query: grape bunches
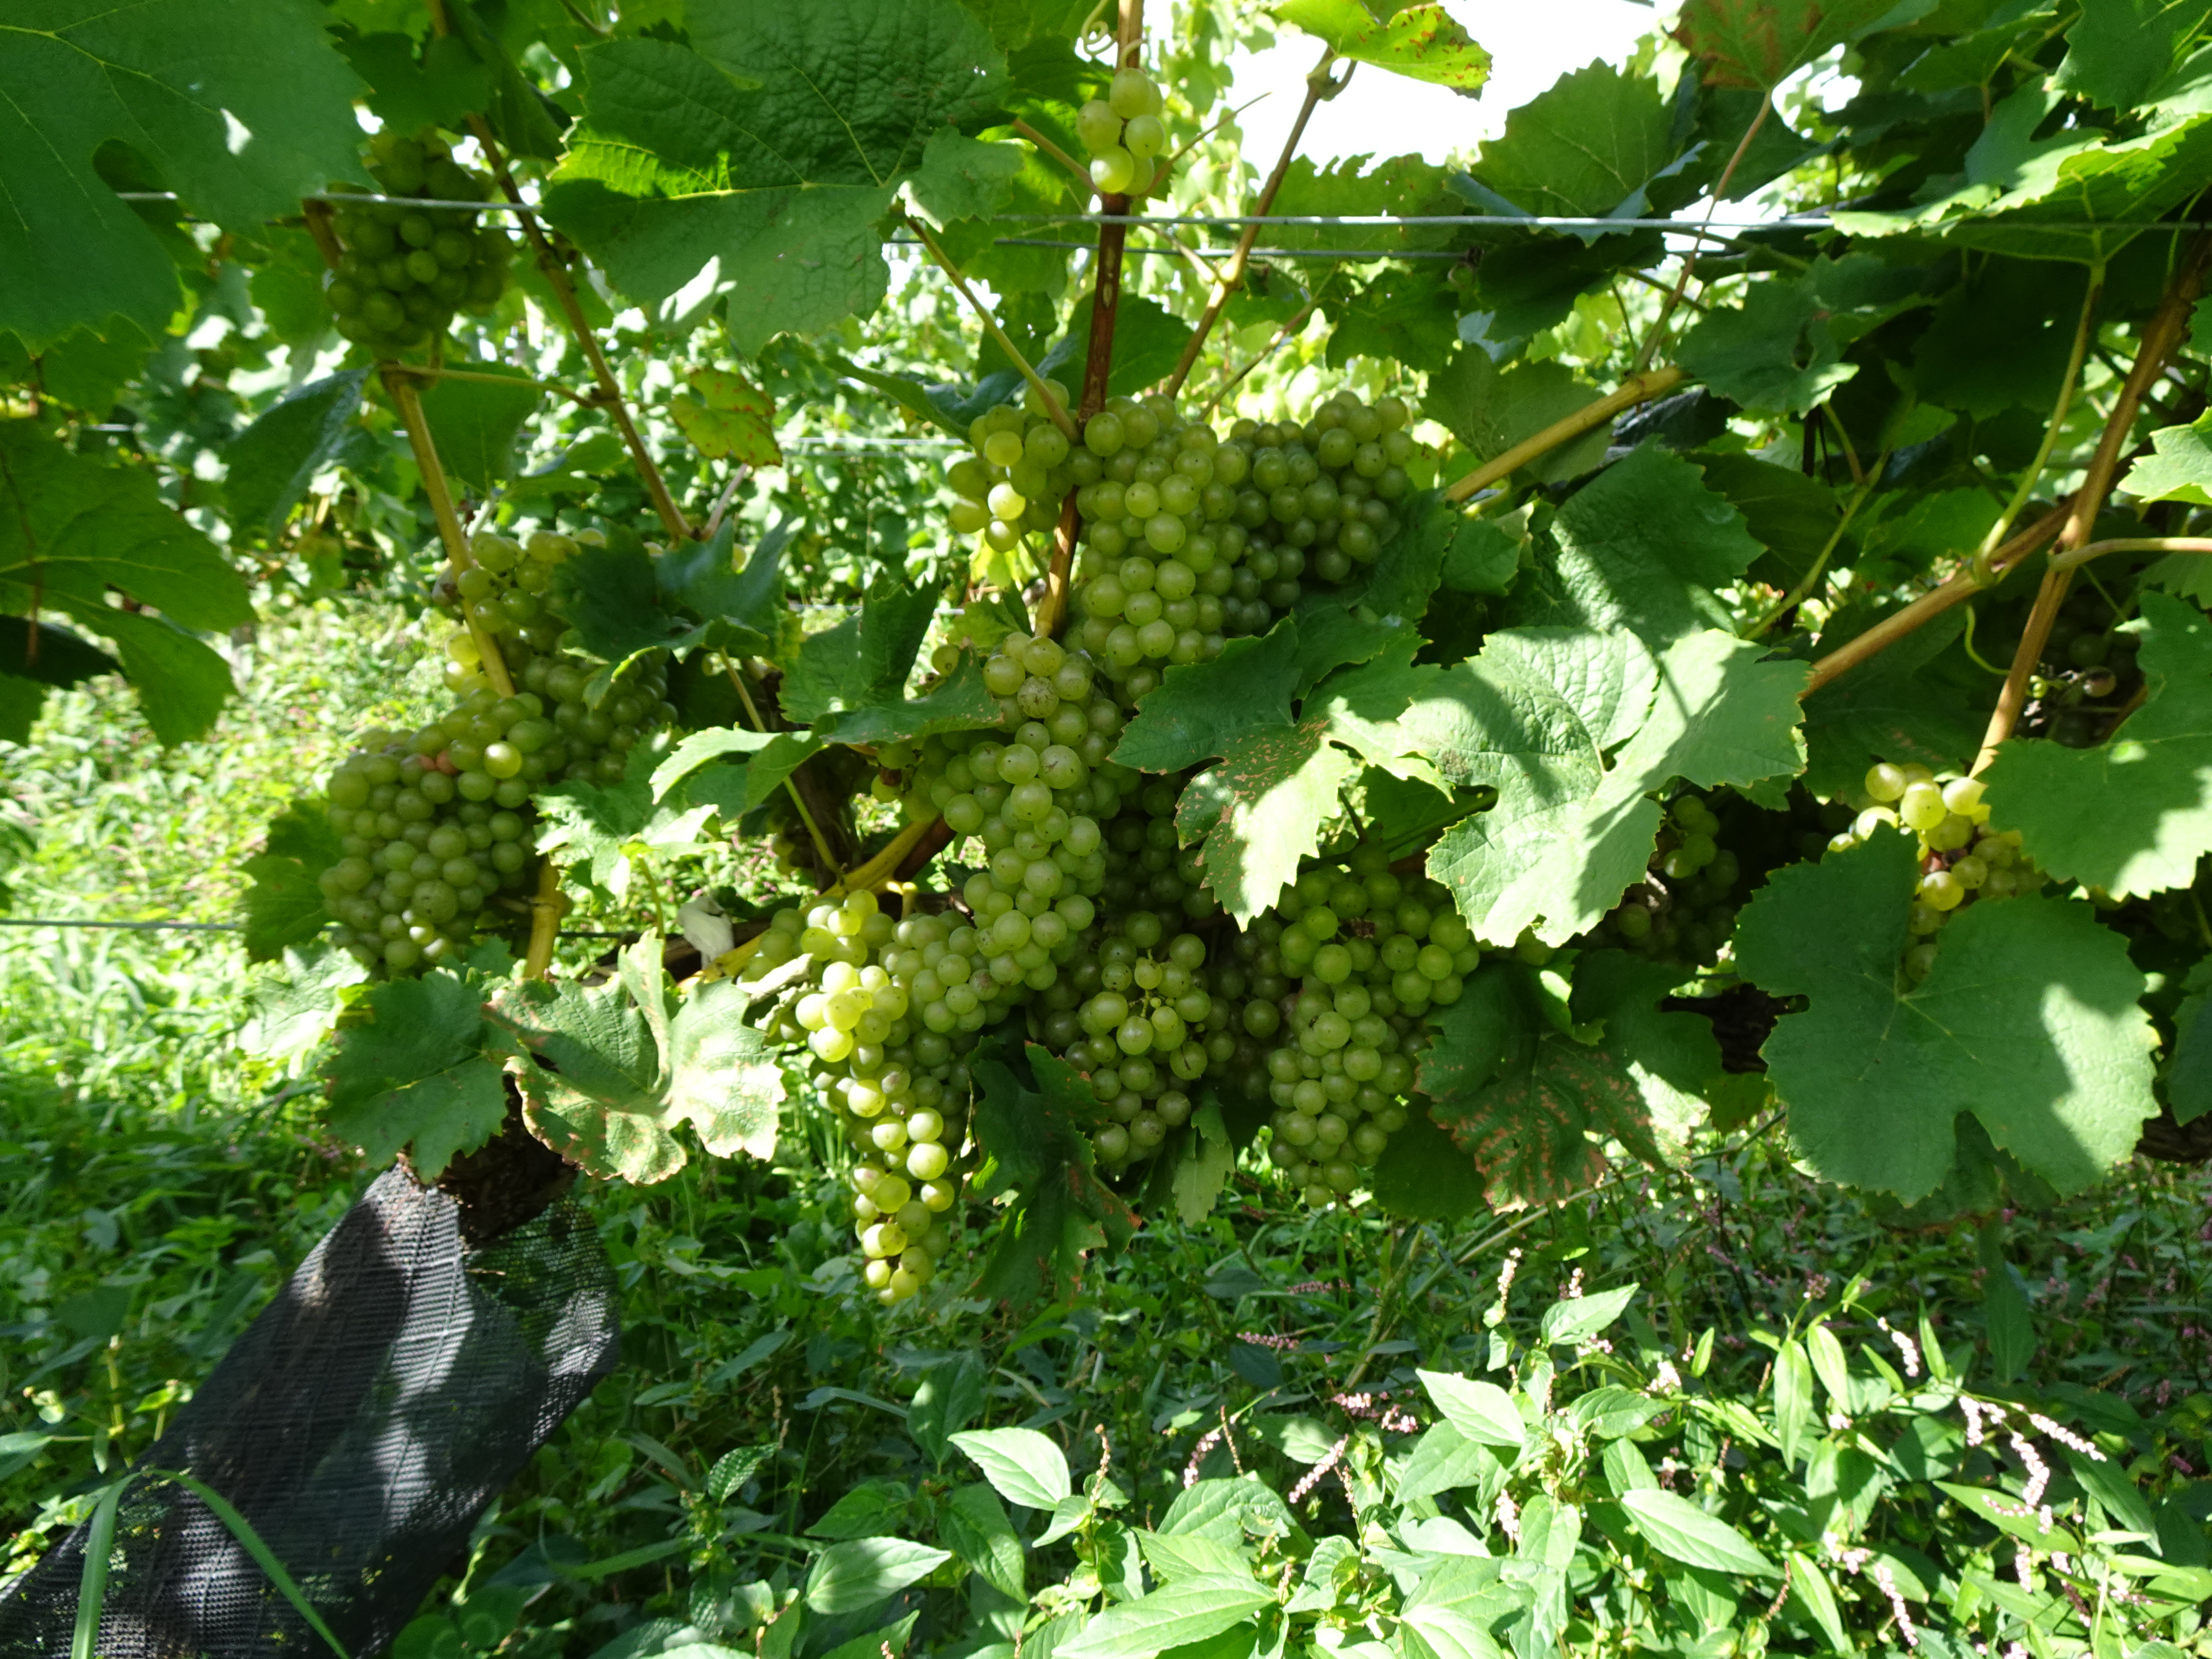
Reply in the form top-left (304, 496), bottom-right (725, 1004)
top-left (328, 127), bottom-right (512, 359)
top-left (1267, 865), bottom-right (1494, 1207)
top-left (458, 530), bottom-right (609, 653)
top-left (1209, 908), bottom-right (1294, 1101)
top-left (1077, 68), bottom-right (1164, 196)
top-left (1046, 917), bottom-right (1234, 1182)
top-left (1802, 760), bottom-right (2052, 993)
top-left (1232, 391), bottom-right (1416, 637)
top-left (319, 690), bottom-right (566, 971)
top-left (945, 379), bottom-right (1249, 708)
top-left (1099, 758), bottom-right (1220, 935)
top-left (871, 628), bottom-right (1146, 968)
top-left (641, 535), bottom-right (746, 570)
top-left (745, 892), bottom-right (1034, 1308)
top-left (506, 629), bottom-right (678, 785)
top-left (1599, 794), bottom-right (1738, 967)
